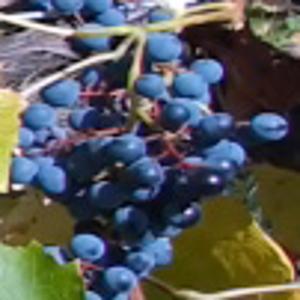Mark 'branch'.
<instances>
[{"label": "branch", "instance_id": "1", "mask_svg": "<svg viewBox=\"0 0 300 300\" xmlns=\"http://www.w3.org/2000/svg\"><path fill=\"white\" fill-rule=\"evenodd\" d=\"M231 16L229 11L196 12L185 15L177 20L161 21L153 24L139 23L125 27H70V26H48L40 24L38 29L50 35H64L78 39H101L124 35L149 34L156 31L173 30L179 32L186 26L198 23L210 25L227 19Z\"/></svg>", "mask_w": 300, "mask_h": 300}]
</instances>
